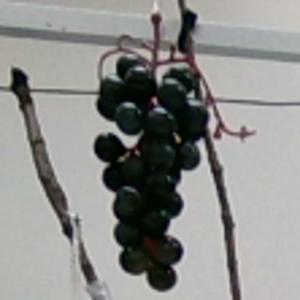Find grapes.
I'll use <instances>...</instances> for the list:
<instances>
[{
  "mask_svg": "<svg viewBox=\"0 0 300 300\" xmlns=\"http://www.w3.org/2000/svg\"><path fill=\"white\" fill-rule=\"evenodd\" d=\"M201 83L192 67H171L158 80L151 61L128 51L118 57L115 74L102 79L95 100L101 118L115 122L127 137L139 135L125 147L117 134L104 131L95 138L93 153L106 164L104 188L115 193L112 235L123 249L119 266L131 277L146 273L148 287L158 293L176 286L174 266L185 254L183 243L167 233L185 209L177 192L181 172L199 167L196 142L211 119L206 104L190 97Z\"/></svg>",
  "mask_w": 300,
  "mask_h": 300,
  "instance_id": "1",
  "label": "grapes"
}]
</instances>
